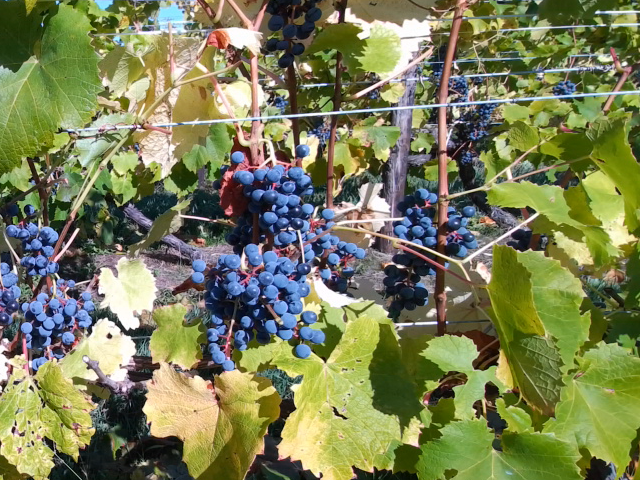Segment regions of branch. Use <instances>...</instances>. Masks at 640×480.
<instances>
[{
	"mask_svg": "<svg viewBox=\"0 0 640 480\" xmlns=\"http://www.w3.org/2000/svg\"><path fill=\"white\" fill-rule=\"evenodd\" d=\"M261 133V122L253 121L250 133V161L253 165L260 163L259 157V137Z\"/></svg>",
	"mask_w": 640,
	"mask_h": 480,
	"instance_id": "obj_8",
	"label": "branch"
},
{
	"mask_svg": "<svg viewBox=\"0 0 640 480\" xmlns=\"http://www.w3.org/2000/svg\"><path fill=\"white\" fill-rule=\"evenodd\" d=\"M339 116L330 117L329 133L325 142V155L327 156V168L325 175V206H334V180L336 173V153L334 146L338 137Z\"/></svg>",
	"mask_w": 640,
	"mask_h": 480,
	"instance_id": "obj_4",
	"label": "branch"
},
{
	"mask_svg": "<svg viewBox=\"0 0 640 480\" xmlns=\"http://www.w3.org/2000/svg\"><path fill=\"white\" fill-rule=\"evenodd\" d=\"M443 288H444V271L437 269L435 271V284H434V309L435 319L438 320L437 333L439 335H445L447 333V325L444 324V304H443Z\"/></svg>",
	"mask_w": 640,
	"mask_h": 480,
	"instance_id": "obj_5",
	"label": "branch"
},
{
	"mask_svg": "<svg viewBox=\"0 0 640 480\" xmlns=\"http://www.w3.org/2000/svg\"><path fill=\"white\" fill-rule=\"evenodd\" d=\"M344 66H345V54L343 52H338L336 54L335 72H334V80H333V90H332V96H331V110L332 111H339L340 110V100H341V94H342Z\"/></svg>",
	"mask_w": 640,
	"mask_h": 480,
	"instance_id": "obj_6",
	"label": "branch"
},
{
	"mask_svg": "<svg viewBox=\"0 0 640 480\" xmlns=\"http://www.w3.org/2000/svg\"><path fill=\"white\" fill-rule=\"evenodd\" d=\"M464 18V7L462 5H457L455 7V14L452 20V24L450 27V35L448 38V43L446 47V54L443 63L442 75H441V84L438 90V101L440 103L448 102V92L450 89V79L452 74V67L455 58V51L457 47V42L459 39V31Z\"/></svg>",
	"mask_w": 640,
	"mask_h": 480,
	"instance_id": "obj_2",
	"label": "branch"
},
{
	"mask_svg": "<svg viewBox=\"0 0 640 480\" xmlns=\"http://www.w3.org/2000/svg\"><path fill=\"white\" fill-rule=\"evenodd\" d=\"M271 7V2L269 0H264L261 3L260 8L258 9L256 15L253 17L251 23H250V29L252 31H257L260 27V25L262 24V22L264 21L267 13L269 12Z\"/></svg>",
	"mask_w": 640,
	"mask_h": 480,
	"instance_id": "obj_9",
	"label": "branch"
},
{
	"mask_svg": "<svg viewBox=\"0 0 640 480\" xmlns=\"http://www.w3.org/2000/svg\"><path fill=\"white\" fill-rule=\"evenodd\" d=\"M449 112L446 108H436L437 125V164L439 182V206L437 216L436 246L439 253H446V221L448 210V178H447V142H446V121Z\"/></svg>",
	"mask_w": 640,
	"mask_h": 480,
	"instance_id": "obj_1",
	"label": "branch"
},
{
	"mask_svg": "<svg viewBox=\"0 0 640 480\" xmlns=\"http://www.w3.org/2000/svg\"><path fill=\"white\" fill-rule=\"evenodd\" d=\"M207 44V40L203 39L202 42L200 43L199 46V51H198V57L196 59V61H194L190 66H188L187 68H185L179 75V77L177 78V80L175 82L172 83V85L164 92V94L153 104V106L148 109L139 119V122H144L147 117L152 114L157 108L158 106H160L163 101L169 96V94L175 89L177 88L182 81L184 80V77L187 75V73H189V71L193 68L194 64L196 62H199L203 53L205 52V50L207 49V46H205Z\"/></svg>",
	"mask_w": 640,
	"mask_h": 480,
	"instance_id": "obj_7",
	"label": "branch"
},
{
	"mask_svg": "<svg viewBox=\"0 0 640 480\" xmlns=\"http://www.w3.org/2000/svg\"><path fill=\"white\" fill-rule=\"evenodd\" d=\"M45 282H46V278H45V277H42V278L38 281V283L36 284L35 288L33 289V294H34V295H37V294H38V292H39L40 288L43 286V284H44Z\"/></svg>",
	"mask_w": 640,
	"mask_h": 480,
	"instance_id": "obj_10",
	"label": "branch"
},
{
	"mask_svg": "<svg viewBox=\"0 0 640 480\" xmlns=\"http://www.w3.org/2000/svg\"><path fill=\"white\" fill-rule=\"evenodd\" d=\"M131 134H132V131L128 130L123 135V137L116 144H114L110 148V150L106 153V155H104L103 158L101 159L98 167L95 169V172L90 176L89 181L86 183L85 187L82 189V192L80 193V196L76 199V202L74 203V205L72 206L71 210L69 211L68 218L66 219L64 225L62 226V229L60 231V235H59L58 239L56 240V242L53 245L52 253L49 256V261L50 262L54 261L56 255H57V252H58V247L63 242V239L65 237V233L67 232V229L70 226L71 221L73 220V216L78 212V209L80 208L81 202L85 198V195L87 194V192L89 191L91 186L93 185L94 180L97 178V176L103 170V168L105 166V163L111 157V155L120 146H122L128 140V138L130 137Z\"/></svg>",
	"mask_w": 640,
	"mask_h": 480,
	"instance_id": "obj_3",
	"label": "branch"
}]
</instances>
